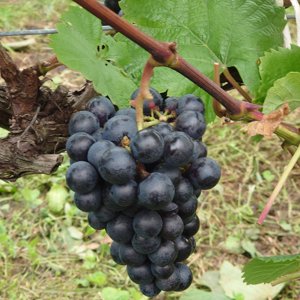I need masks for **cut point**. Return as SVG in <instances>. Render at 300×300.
Instances as JSON below:
<instances>
[{"instance_id": "obj_1", "label": "cut point", "mask_w": 300, "mask_h": 300, "mask_svg": "<svg viewBox=\"0 0 300 300\" xmlns=\"http://www.w3.org/2000/svg\"><path fill=\"white\" fill-rule=\"evenodd\" d=\"M155 67H165V63L156 59L153 55H148V61L144 67L143 75L140 81V91L130 104L136 109L137 132L143 130V100L149 94V81L154 75Z\"/></svg>"}]
</instances>
